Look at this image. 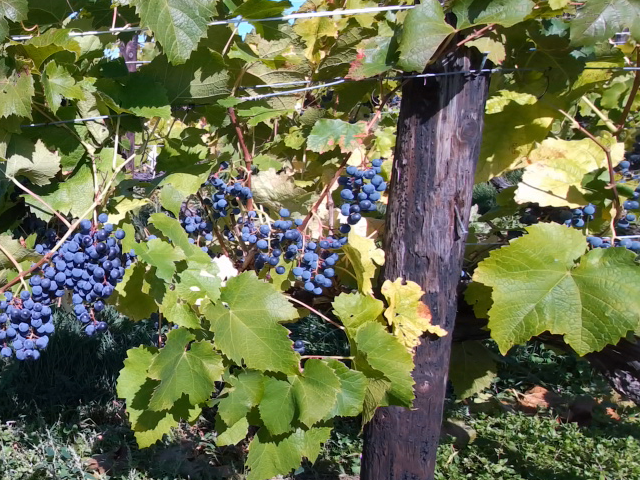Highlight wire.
I'll use <instances>...</instances> for the list:
<instances>
[{
	"mask_svg": "<svg viewBox=\"0 0 640 480\" xmlns=\"http://www.w3.org/2000/svg\"><path fill=\"white\" fill-rule=\"evenodd\" d=\"M414 5H400V6H376V7H362V8H348L340 10H330L322 12H302V13H289L283 15H269L263 17H242V18H225L219 20H213L209 22L210 26L222 25L228 23H244V22H265L271 20H285L291 18H305V17H324L332 15H343L350 13H365V12H378V11H403L414 10Z\"/></svg>",
	"mask_w": 640,
	"mask_h": 480,
	"instance_id": "wire-1",
	"label": "wire"
},
{
	"mask_svg": "<svg viewBox=\"0 0 640 480\" xmlns=\"http://www.w3.org/2000/svg\"><path fill=\"white\" fill-rule=\"evenodd\" d=\"M333 78L338 80H333L331 82L324 83V84H315V85L296 87V88H285V89L276 90L272 92L255 93L251 95L242 96L241 100L249 101L257 98L275 97V96H279L287 93H299V92H306V91H312L317 89H326V88H331L336 85L344 84L347 82V79L342 78L341 74H334Z\"/></svg>",
	"mask_w": 640,
	"mask_h": 480,
	"instance_id": "wire-2",
	"label": "wire"
},
{
	"mask_svg": "<svg viewBox=\"0 0 640 480\" xmlns=\"http://www.w3.org/2000/svg\"><path fill=\"white\" fill-rule=\"evenodd\" d=\"M478 71H479L478 67H468V68H461V69H451L446 71L430 72V73L421 74V75L371 76V77H366L365 81L373 82V81H392V80H424V79H429L433 77H441V76H448L453 74H463V73H471V72H478Z\"/></svg>",
	"mask_w": 640,
	"mask_h": 480,
	"instance_id": "wire-3",
	"label": "wire"
},
{
	"mask_svg": "<svg viewBox=\"0 0 640 480\" xmlns=\"http://www.w3.org/2000/svg\"><path fill=\"white\" fill-rule=\"evenodd\" d=\"M127 112H114L108 114H97V115H89V116H76L70 119H58L55 121H36L31 123H25L22 125L23 129L34 128L38 126H57L61 124H70L79 121H91V120H99V119H111L117 117H127Z\"/></svg>",
	"mask_w": 640,
	"mask_h": 480,
	"instance_id": "wire-4",
	"label": "wire"
},
{
	"mask_svg": "<svg viewBox=\"0 0 640 480\" xmlns=\"http://www.w3.org/2000/svg\"><path fill=\"white\" fill-rule=\"evenodd\" d=\"M147 26H139V27H111L110 29L98 30V31H79L74 32L70 31L69 35L71 37H81V36H101L106 34H120V33H136L147 31Z\"/></svg>",
	"mask_w": 640,
	"mask_h": 480,
	"instance_id": "wire-5",
	"label": "wire"
},
{
	"mask_svg": "<svg viewBox=\"0 0 640 480\" xmlns=\"http://www.w3.org/2000/svg\"><path fill=\"white\" fill-rule=\"evenodd\" d=\"M310 83H311L310 79L292 80V81L274 82V83H260V84L240 86L239 90L246 91V90H256V89H262V88L289 87V86H295V85H306Z\"/></svg>",
	"mask_w": 640,
	"mask_h": 480,
	"instance_id": "wire-6",
	"label": "wire"
}]
</instances>
